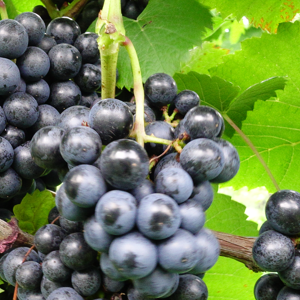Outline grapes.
Masks as SVG:
<instances>
[{"instance_id": "01657485", "label": "grapes", "mask_w": 300, "mask_h": 300, "mask_svg": "<svg viewBox=\"0 0 300 300\" xmlns=\"http://www.w3.org/2000/svg\"><path fill=\"white\" fill-rule=\"evenodd\" d=\"M97 34L68 17L0 21V219L34 189L55 192L38 253L12 249L0 277L19 300H207L220 256L204 227L211 183L238 173L223 116L167 74L102 99Z\"/></svg>"}, {"instance_id": "b958b902", "label": "grapes", "mask_w": 300, "mask_h": 300, "mask_svg": "<svg viewBox=\"0 0 300 300\" xmlns=\"http://www.w3.org/2000/svg\"><path fill=\"white\" fill-rule=\"evenodd\" d=\"M267 220L252 246L256 265L268 273L255 283L258 300L300 297V192L279 190L266 202Z\"/></svg>"}]
</instances>
